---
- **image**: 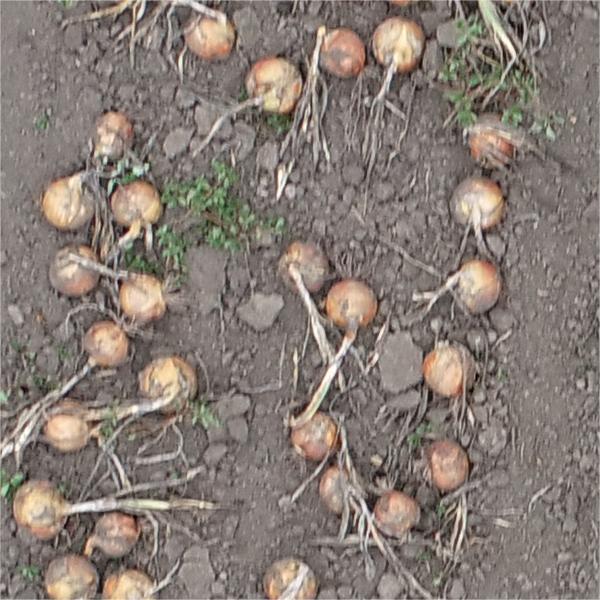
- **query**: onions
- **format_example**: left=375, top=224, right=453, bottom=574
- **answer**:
left=282, top=240, right=327, bottom=287
left=13, top=479, right=68, bottom=538
left=318, top=470, right=347, bottom=513
left=185, top=10, right=234, bottom=58
left=262, top=557, right=316, bottom=598
left=85, top=322, right=129, bottom=366
left=369, top=20, right=424, bottom=67
left=40, top=177, right=90, bottom=227
left=118, top=274, right=164, bottom=319
left=449, top=177, right=504, bottom=225
left=423, top=440, right=468, bottom=489
left=139, top=355, right=195, bottom=412
left=102, top=565, right=152, bottom=599
left=108, top=181, right=163, bottom=228
left=50, top=244, right=99, bottom=295
left=453, top=259, right=499, bottom=311
left=89, top=511, right=138, bottom=559
left=291, top=410, right=338, bottom=460
left=248, top=56, right=300, bottom=112
left=320, top=28, right=364, bottom=75
left=420, top=346, right=472, bottom=395
left=46, top=411, right=86, bottom=450
left=466, top=116, right=514, bottom=166
left=323, top=280, right=378, bottom=328
left=88, top=114, right=133, bottom=160
left=371, top=491, right=417, bottom=537
left=42, top=553, right=99, bottom=596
